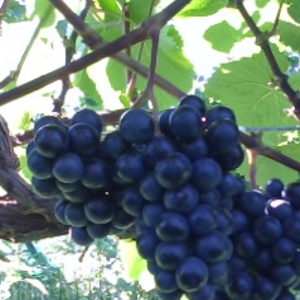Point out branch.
<instances>
[{
    "instance_id": "2",
    "label": "branch",
    "mask_w": 300,
    "mask_h": 300,
    "mask_svg": "<svg viewBox=\"0 0 300 300\" xmlns=\"http://www.w3.org/2000/svg\"><path fill=\"white\" fill-rule=\"evenodd\" d=\"M240 141L256 152L258 155H264L270 159L277 161L278 163L287 166L295 171H300V161L288 157L278 150L270 148L269 146L261 143V137L258 133L242 134Z\"/></svg>"
},
{
    "instance_id": "3",
    "label": "branch",
    "mask_w": 300,
    "mask_h": 300,
    "mask_svg": "<svg viewBox=\"0 0 300 300\" xmlns=\"http://www.w3.org/2000/svg\"><path fill=\"white\" fill-rule=\"evenodd\" d=\"M155 84L160 89L167 91L175 99H181L183 96H186V93H183L178 87H176L171 82L165 80L162 76H159L156 73H155Z\"/></svg>"
},
{
    "instance_id": "4",
    "label": "branch",
    "mask_w": 300,
    "mask_h": 300,
    "mask_svg": "<svg viewBox=\"0 0 300 300\" xmlns=\"http://www.w3.org/2000/svg\"><path fill=\"white\" fill-rule=\"evenodd\" d=\"M124 111H126V109H115L109 112H103L100 116L103 125H119L120 118L123 116Z\"/></svg>"
},
{
    "instance_id": "1",
    "label": "branch",
    "mask_w": 300,
    "mask_h": 300,
    "mask_svg": "<svg viewBox=\"0 0 300 300\" xmlns=\"http://www.w3.org/2000/svg\"><path fill=\"white\" fill-rule=\"evenodd\" d=\"M52 4L61 13V15L79 31L82 35L83 42L93 49V51L80 58L67 62L65 66L56 69L53 72L28 81L10 91L3 92L0 95V105H4L9 101L15 100L22 95L39 89L46 84L57 81L60 78L90 66L91 64L107 57L116 59L138 73L141 77H145V79H147L148 68L139 63L137 60L131 58L122 50L140 42L143 39H147L150 36V32L153 30L164 27L170 21L171 17H174L177 12H179L187 4V0H176L173 4H170L163 10L158 11L153 17L145 19L139 27L128 31L127 33L119 36L117 39H113L109 42L101 39L100 36L94 33L78 15L72 12L65 4V0H52Z\"/></svg>"
}]
</instances>
